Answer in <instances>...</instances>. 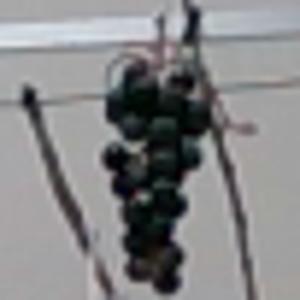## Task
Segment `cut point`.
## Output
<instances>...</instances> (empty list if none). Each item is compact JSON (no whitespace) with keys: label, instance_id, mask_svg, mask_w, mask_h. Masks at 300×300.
<instances>
[{"label":"cut point","instance_id":"obj_1","mask_svg":"<svg viewBox=\"0 0 300 300\" xmlns=\"http://www.w3.org/2000/svg\"><path fill=\"white\" fill-rule=\"evenodd\" d=\"M171 16L172 0H159L150 17L151 26L157 32V60L151 65V69L159 77L166 71V27Z\"/></svg>","mask_w":300,"mask_h":300}]
</instances>
